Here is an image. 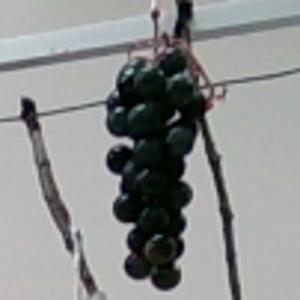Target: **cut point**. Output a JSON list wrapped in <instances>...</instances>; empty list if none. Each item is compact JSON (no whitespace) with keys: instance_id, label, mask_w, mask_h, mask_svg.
Instances as JSON below:
<instances>
[{"instance_id":"cut-point-1","label":"cut point","mask_w":300,"mask_h":300,"mask_svg":"<svg viewBox=\"0 0 300 300\" xmlns=\"http://www.w3.org/2000/svg\"><path fill=\"white\" fill-rule=\"evenodd\" d=\"M163 18V11L160 9V0H150V6L148 10V20L153 25V52L152 60L159 54V31L160 21Z\"/></svg>"}]
</instances>
